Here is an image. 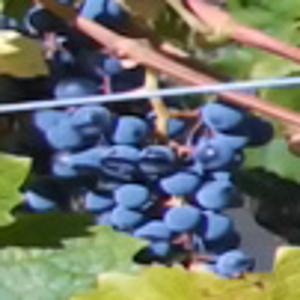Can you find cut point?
Masks as SVG:
<instances>
[{"label":"cut point","mask_w":300,"mask_h":300,"mask_svg":"<svg viewBox=\"0 0 300 300\" xmlns=\"http://www.w3.org/2000/svg\"><path fill=\"white\" fill-rule=\"evenodd\" d=\"M150 106L156 114V137L166 143L168 141V134L166 127L169 121V114L164 104V100L161 97H155L150 99Z\"/></svg>","instance_id":"6a23745f"}]
</instances>
